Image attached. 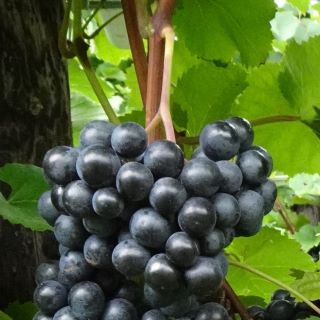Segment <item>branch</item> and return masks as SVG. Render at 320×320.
Here are the masks:
<instances>
[{
    "label": "branch",
    "instance_id": "1",
    "mask_svg": "<svg viewBox=\"0 0 320 320\" xmlns=\"http://www.w3.org/2000/svg\"><path fill=\"white\" fill-rule=\"evenodd\" d=\"M176 2L177 0H159V7L152 17L150 0H135L136 15L142 38L149 39L144 130L152 122L160 106L165 49V39L161 37V31L165 27L173 29L172 16Z\"/></svg>",
    "mask_w": 320,
    "mask_h": 320
},
{
    "label": "branch",
    "instance_id": "2",
    "mask_svg": "<svg viewBox=\"0 0 320 320\" xmlns=\"http://www.w3.org/2000/svg\"><path fill=\"white\" fill-rule=\"evenodd\" d=\"M121 1L128 40L132 51L136 74L138 78L141 98L146 111L148 56L145 53L143 38L136 17L135 0Z\"/></svg>",
    "mask_w": 320,
    "mask_h": 320
}]
</instances>
